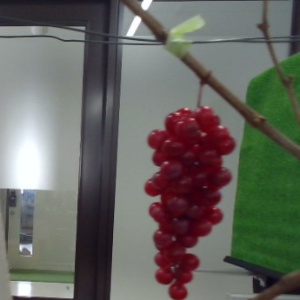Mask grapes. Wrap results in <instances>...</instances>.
<instances>
[{"label":"grapes","mask_w":300,"mask_h":300,"mask_svg":"<svg viewBox=\"0 0 300 300\" xmlns=\"http://www.w3.org/2000/svg\"><path fill=\"white\" fill-rule=\"evenodd\" d=\"M220 124L221 116L210 106L178 108L164 116L165 130L154 129L147 136L151 163L163 166L144 186L147 198H161L148 206L149 217L160 225L152 234L159 251L153 256L158 265L154 277L160 285L172 283L173 300L189 297L184 285L200 266V258L188 248L224 219L215 206L233 172L223 166V156L237 152V140Z\"/></svg>","instance_id":"obj_1"}]
</instances>
